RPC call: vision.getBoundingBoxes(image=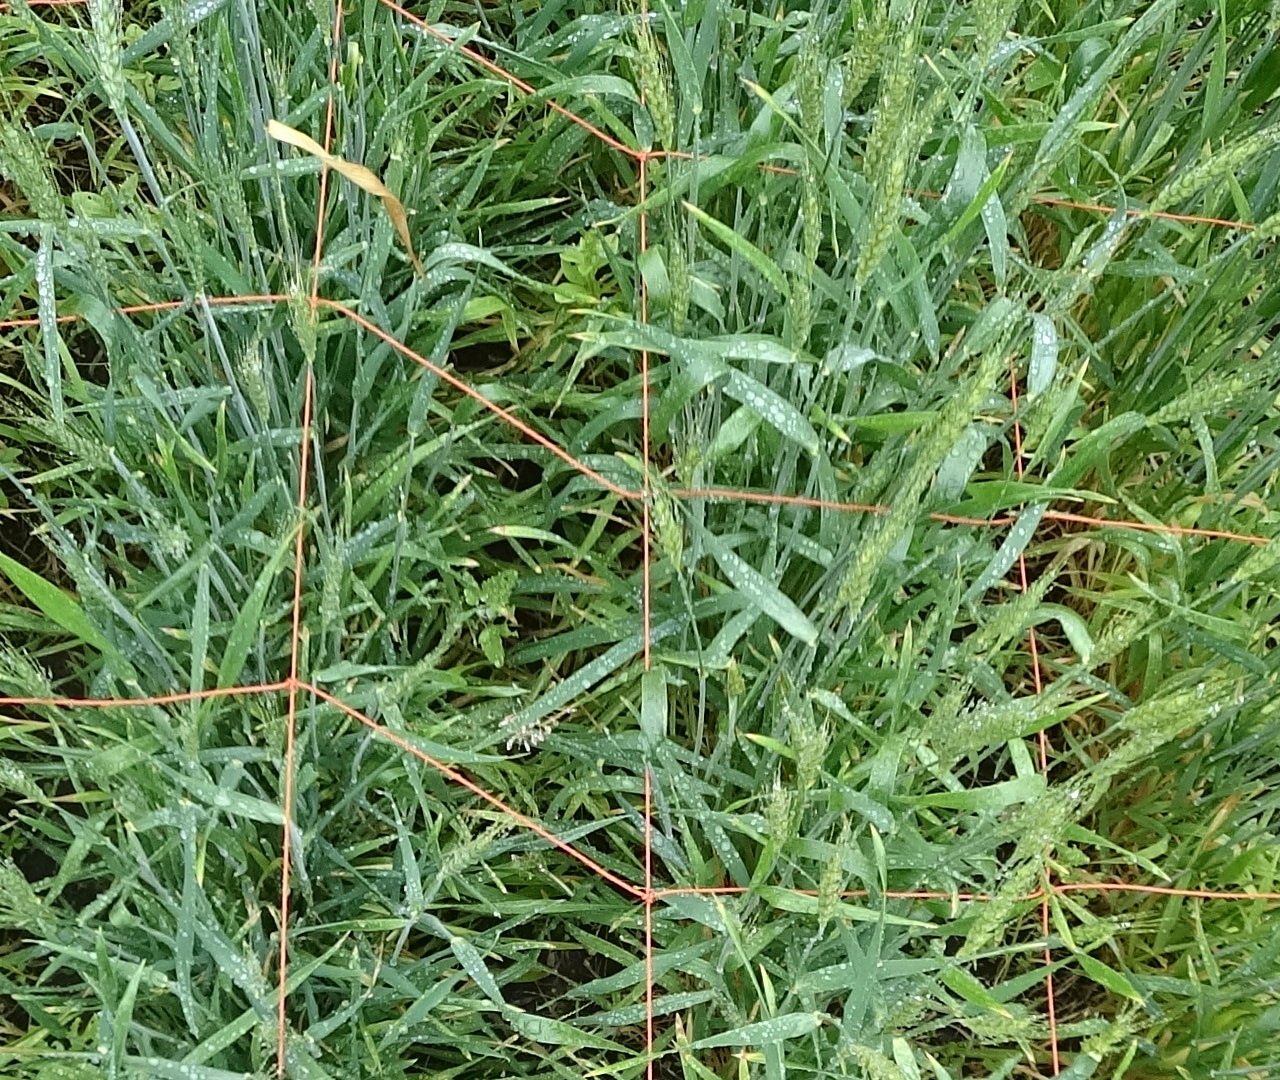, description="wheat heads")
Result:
[868,43,911,154]
[176,21,204,86]
[995,578,1047,647]
[949,703,1038,755]
[1078,616,1149,662]
[1022,385,1064,452]
[281,283,324,358]
[1148,369,1249,431]
[1230,531,1280,576]
[968,0,991,58]
[872,988,931,1028]
[65,548,108,604]
[838,507,914,607]
[967,876,1028,949]
[223,166,257,250]
[239,343,270,413]
[773,792,789,849]
[630,475,681,554]
[656,231,687,330]
[633,36,676,141]
[35,418,108,467]
[913,360,989,487]
[1016,797,1063,856]
[798,718,828,794]
[438,841,482,886]
[814,859,854,941]
[314,532,350,642]
[791,280,813,339]
[961,1012,1030,1028]
[1137,123,1275,207]
[1116,687,1220,734]
[794,48,830,145]
[87,4,133,98]
[794,186,830,263]
[4,117,61,231]
[863,161,911,286]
